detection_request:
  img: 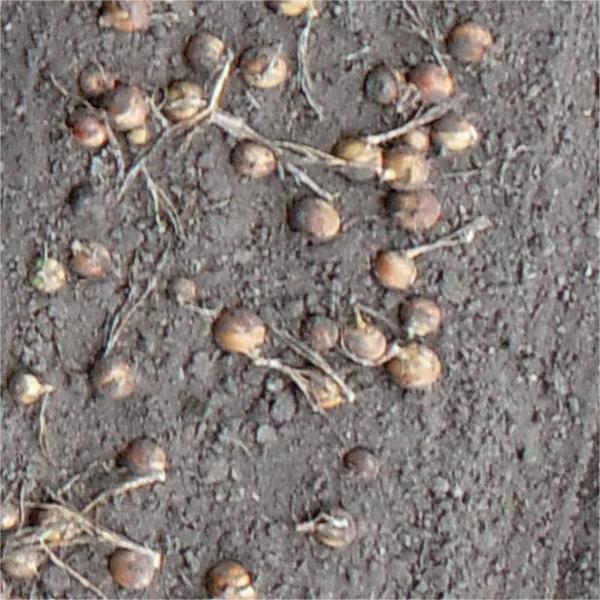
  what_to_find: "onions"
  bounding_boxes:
[340,445,376,482]
[185,31,226,73]
[3,545,42,583]
[400,298,441,339]
[446,22,490,66]
[307,318,339,349]
[164,80,202,122]
[102,3,150,34]
[0,501,22,531]
[81,65,110,98]
[71,239,109,280]
[10,371,45,405]
[317,508,355,550]
[387,342,439,388]
[126,127,151,151]
[406,127,430,154]
[242,46,286,89]
[114,89,146,130]
[269,0,307,18]
[35,502,80,540]
[434,117,477,153]
[381,147,426,186]
[305,373,351,411]
[391,187,439,231]
[92,354,137,397]
[288,194,339,240]
[411,62,449,100]
[372,250,416,289]
[233,141,275,181]
[108,546,155,589]
[207,559,254,596]
[69,110,107,149]
[29,257,66,294]
[340,141,380,180]
[170,275,196,302]
[212,307,265,353]
[365,67,401,103]
[120,436,164,479]
[343,322,386,361]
